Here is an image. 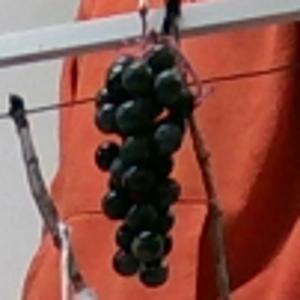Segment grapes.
Returning a JSON list of instances; mask_svg holds the SVG:
<instances>
[{"instance_id": "obj_1", "label": "grapes", "mask_w": 300, "mask_h": 300, "mask_svg": "<svg viewBox=\"0 0 300 300\" xmlns=\"http://www.w3.org/2000/svg\"><path fill=\"white\" fill-rule=\"evenodd\" d=\"M170 46L154 43L137 56H115L101 77L92 107L93 124L106 139L96 145L92 164L109 174L108 190L99 199L101 214L120 223L113 233L118 250L110 259L116 276L138 275L148 289L167 285L172 271L168 256L175 248L171 229L177 215L171 205L183 193L174 156L187 137L198 99L188 90L190 78L180 69Z\"/></svg>"}]
</instances>
